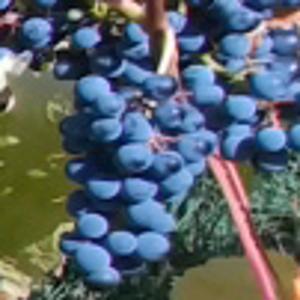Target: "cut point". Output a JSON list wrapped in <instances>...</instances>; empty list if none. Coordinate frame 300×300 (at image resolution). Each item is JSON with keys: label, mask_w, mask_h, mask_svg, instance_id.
Wrapping results in <instances>:
<instances>
[{"label": "cut point", "mask_w": 300, "mask_h": 300, "mask_svg": "<svg viewBox=\"0 0 300 300\" xmlns=\"http://www.w3.org/2000/svg\"><path fill=\"white\" fill-rule=\"evenodd\" d=\"M166 31H167V43H166L164 55L162 56L159 66L157 67V72L159 74L166 73V69L169 67L170 59H171V47L176 44L175 29L171 25H168Z\"/></svg>", "instance_id": "obj_1"}]
</instances>
